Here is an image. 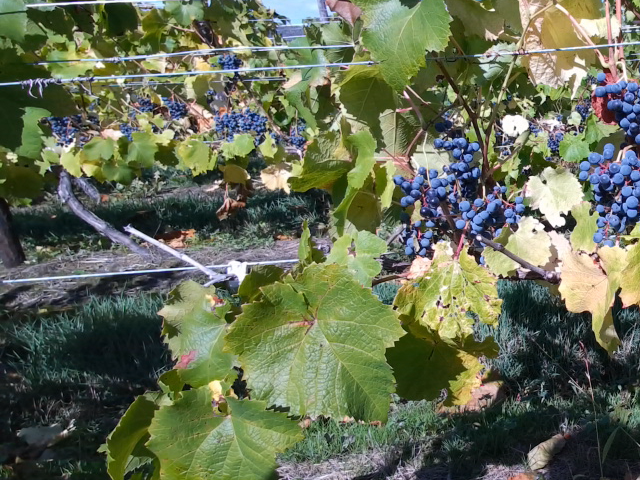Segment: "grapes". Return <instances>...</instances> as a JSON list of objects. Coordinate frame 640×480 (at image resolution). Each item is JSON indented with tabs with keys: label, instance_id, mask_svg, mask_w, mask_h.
<instances>
[{
	"label": "grapes",
	"instance_id": "obj_6",
	"mask_svg": "<svg viewBox=\"0 0 640 480\" xmlns=\"http://www.w3.org/2000/svg\"><path fill=\"white\" fill-rule=\"evenodd\" d=\"M604 235H605L604 230L602 228H598L595 231V234L592 237V241L594 243H601L603 241L604 245H608L609 247H613L614 246V242L611 241V240H604Z\"/></svg>",
	"mask_w": 640,
	"mask_h": 480
},
{
	"label": "grapes",
	"instance_id": "obj_2",
	"mask_svg": "<svg viewBox=\"0 0 640 480\" xmlns=\"http://www.w3.org/2000/svg\"><path fill=\"white\" fill-rule=\"evenodd\" d=\"M616 153L614 143H606L603 146L602 154L591 152L587 157V161H581L579 164L578 174L579 181H587L594 186V198L598 202L595 210L599 214L605 212L602 203H607L613 214L606 213L604 217H598L595 224L598 227H605L607 223L614 227V230L621 234L625 231L626 223L634 224L640 220V209L637 207L640 201V158L634 150H627L622 155L621 164L619 162H611L606 167L607 173H602V169L596 166L593 174L588 172L591 165H599L606 160H612ZM632 180L631 185H624L621 188V194L618 201L613 202V196L609 192H613L617 185L624 183V178Z\"/></svg>",
	"mask_w": 640,
	"mask_h": 480
},
{
	"label": "grapes",
	"instance_id": "obj_3",
	"mask_svg": "<svg viewBox=\"0 0 640 480\" xmlns=\"http://www.w3.org/2000/svg\"><path fill=\"white\" fill-rule=\"evenodd\" d=\"M623 90L627 91L624 94V101L612 98L606 102V109L609 112H615L618 127L624 129L627 134L625 140L619 144L621 150L634 143L640 145V86L636 82L619 81L594 89V95L600 98H605L607 93L621 94Z\"/></svg>",
	"mask_w": 640,
	"mask_h": 480
},
{
	"label": "grapes",
	"instance_id": "obj_5",
	"mask_svg": "<svg viewBox=\"0 0 640 480\" xmlns=\"http://www.w3.org/2000/svg\"><path fill=\"white\" fill-rule=\"evenodd\" d=\"M434 238V233L431 230H427L422 234V237L418 240L419 248L418 254L424 256L427 253V249L431 247V240Z\"/></svg>",
	"mask_w": 640,
	"mask_h": 480
},
{
	"label": "grapes",
	"instance_id": "obj_1",
	"mask_svg": "<svg viewBox=\"0 0 640 480\" xmlns=\"http://www.w3.org/2000/svg\"><path fill=\"white\" fill-rule=\"evenodd\" d=\"M433 145L436 149H443L445 151H453V158L460 162H453L449 166L443 165L442 171L447 174L446 178H437L438 171L436 169H430L427 172L425 167H419L417 173L424 175L416 177L412 183H409L403 175H395L393 177V183L399 186V189L403 191L407 196L400 199V206L402 208H408L410 205H415L417 200L423 197L421 188H426L428 182L426 179H430V189L425 191V203L428 206L422 207L419 210V214L422 217L439 218L441 213L439 212L440 199L447 195V186L450 194L448 201L451 203L453 209L459 210L462 213V219H458L455 222L457 229H464L467 221L471 219V231L469 236L475 238L478 234H481L484 238L490 239L492 234L486 229L489 225H495L496 230L493 232L495 237H498L503 232V224L506 223H518L522 216L518 213L525 211L524 199L521 196H517L514 199V205L511 208H507L503 201L497 198L495 193H487L486 198L490 201L484 210L479 213H475V209L472 208V204L469 201H460L459 192L454 189V184L458 179V184L461 186L460 195L469 199L473 193L476 192V181L483 175V170L478 166H472L470 163L474 160L473 153H476L480 149V143L473 141L469 143L467 138L455 137L453 141L443 140L440 137H435Z\"/></svg>",
	"mask_w": 640,
	"mask_h": 480
},
{
	"label": "grapes",
	"instance_id": "obj_4",
	"mask_svg": "<svg viewBox=\"0 0 640 480\" xmlns=\"http://www.w3.org/2000/svg\"><path fill=\"white\" fill-rule=\"evenodd\" d=\"M422 226V222L420 220L415 221L412 224V227L414 228L413 230H411L409 227H406L404 229V237H405V241H406V247L404 248V254L406 256H413L415 254V244L414 242V237H416L419 234V231L417 229H419Z\"/></svg>",
	"mask_w": 640,
	"mask_h": 480
}]
</instances>
